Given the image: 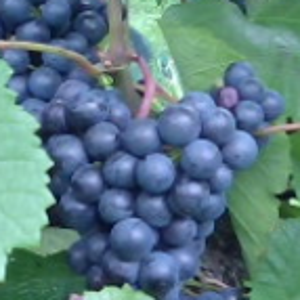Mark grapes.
<instances>
[{
    "label": "grapes",
    "mask_w": 300,
    "mask_h": 300,
    "mask_svg": "<svg viewBox=\"0 0 300 300\" xmlns=\"http://www.w3.org/2000/svg\"><path fill=\"white\" fill-rule=\"evenodd\" d=\"M10 85L45 125L58 160L52 193L61 222L84 237L72 268L91 287L132 280L173 300L200 271L235 169H249L268 141L266 120L285 110L248 61L232 62L210 93L187 94L159 118L136 115L118 88L46 52L6 49Z\"/></svg>",
    "instance_id": "grapes-1"
}]
</instances>
